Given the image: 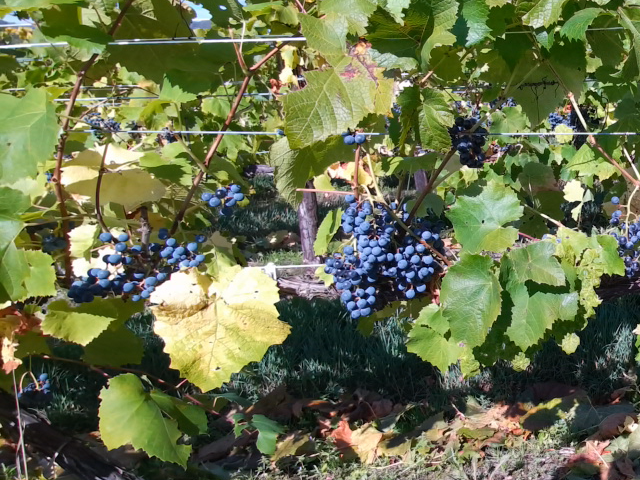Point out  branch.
Returning a JSON list of instances; mask_svg holds the SVG:
<instances>
[{
  "mask_svg": "<svg viewBox=\"0 0 640 480\" xmlns=\"http://www.w3.org/2000/svg\"><path fill=\"white\" fill-rule=\"evenodd\" d=\"M369 147H370V143L366 142L364 144V157H365L366 164L368 166L370 180L374 185V191H375L376 197H377L378 201L383 205V207L385 208L386 212L391 215V217L398 223L399 226L402 227V230H401L399 236L397 237V242L401 243L402 240L404 239L405 235L407 234L411 238L415 239L417 242H419L422 245H425L426 247H428V249L431 250L436 256H438V258L444 264L449 265L450 261L437 248H435L427 240L423 239L422 237L418 236L416 233L412 232L408 228V226L410 224L411 219L413 218L414 213L417 211V209L420 207V205L424 201V198L426 196V193H427L428 189L430 188L431 185H433L435 183V181L441 175V173H442L443 169L445 168L446 164L448 163L449 159L455 154L456 149L455 148H451L450 151L444 156V159L440 163V165L437 168L435 174L433 175V177L430 180H428L426 182V184L424 185V187H423V189L421 191V194H420L418 200L416 201L414 206L410 209L408 215L406 216L405 222H403L402 219L399 218L398 215L395 213V211L390 208L388 202L383 198V196H382V194L380 192L379 183H378V181H377V179L375 177L373 163L371 161L370 154H369Z\"/></svg>",
  "mask_w": 640,
  "mask_h": 480,
  "instance_id": "30e6481e",
  "label": "branch"
},
{
  "mask_svg": "<svg viewBox=\"0 0 640 480\" xmlns=\"http://www.w3.org/2000/svg\"><path fill=\"white\" fill-rule=\"evenodd\" d=\"M99 57H100L99 53H94L88 59V61L84 65L82 71L80 72L79 77L77 78V80L75 82V86L72 89L70 100H69V104H68L66 112L64 114V118L61 120L62 134H61V138H59L58 141H57V160H56V164H55V168H54L53 191H54V194H55L56 198L59 201L60 211H61V215H62V222H63V227H64L63 238L66 240V245L64 247L65 257L63 258V261L65 262V269H66V277H65V280H64L65 284H69L70 280H71L70 250H69V237H68L69 224H68V219H67V213H66V209H65V203H64V199H63V194L61 192V185H60V181H59V170H60L61 163H62V156H63L64 150H65V140L68 138V130H67L69 128V120H68V118L70 117V114L72 112V109H73V106H74V102H75V98H76L77 92L79 90V86H80L81 82L83 81V79H84L86 73L88 72L89 68L93 64V62Z\"/></svg>",
  "mask_w": 640,
  "mask_h": 480,
  "instance_id": "325d2c04",
  "label": "branch"
},
{
  "mask_svg": "<svg viewBox=\"0 0 640 480\" xmlns=\"http://www.w3.org/2000/svg\"><path fill=\"white\" fill-rule=\"evenodd\" d=\"M287 45V42H281L278 45L274 46L269 52H267L262 58H260L255 64H253L248 71L246 72L244 79L242 81V87L241 90L239 91V93L237 94V97L235 98L231 109L229 111V113L226 116V121L224 123V125L222 126V130H227L231 124V119L232 116L235 114L236 109L238 107V104L240 102V99L243 97L244 93L246 92L247 89V84L248 81L250 79V76L252 75V73L259 68L265 61H267L271 56H273L277 51H279L280 49L284 48Z\"/></svg>",
  "mask_w": 640,
  "mask_h": 480,
  "instance_id": "170604dd",
  "label": "branch"
},
{
  "mask_svg": "<svg viewBox=\"0 0 640 480\" xmlns=\"http://www.w3.org/2000/svg\"><path fill=\"white\" fill-rule=\"evenodd\" d=\"M112 142V135H107L106 142L104 144L103 150L101 152L100 163L98 168V176L97 182L95 185V216L98 220V223L104 232L108 231V227L105 225L104 220L100 214V187L103 179V171L105 165L106 155L108 153L109 146Z\"/></svg>",
  "mask_w": 640,
  "mask_h": 480,
  "instance_id": "45aa463d",
  "label": "branch"
},
{
  "mask_svg": "<svg viewBox=\"0 0 640 480\" xmlns=\"http://www.w3.org/2000/svg\"><path fill=\"white\" fill-rule=\"evenodd\" d=\"M203 175H204V171L200 170L198 172V174L195 176V178L193 179L191 187H190L188 193L185 196V199H184V201H183V203H182V205H181V207L179 209V212H178V214L176 216V219L172 223V228H171V232H170L171 236H174L176 234L177 225L181 222V219H182V217L184 215L186 207L189 204V201H190L191 197L194 194L196 186H197L198 182L200 181V179L203 177Z\"/></svg>",
  "mask_w": 640,
  "mask_h": 480,
  "instance_id": "982ccf7c",
  "label": "branch"
},
{
  "mask_svg": "<svg viewBox=\"0 0 640 480\" xmlns=\"http://www.w3.org/2000/svg\"><path fill=\"white\" fill-rule=\"evenodd\" d=\"M589 141L590 143L594 146V148L603 156L606 157V159L610 162V164L619 172L621 173L623 176H625L629 181H631L632 183H634L638 188H640V181L637 180L636 178H634L628 171H626L625 169H623L611 156L610 153H608L606 150H604L598 143L597 141L594 139V136H589Z\"/></svg>",
  "mask_w": 640,
  "mask_h": 480,
  "instance_id": "1ff4a987",
  "label": "branch"
},
{
  "mask_svg": "<svg viewBox=\"0 0 640 480\" xmlns=\"http://www.w3.org/2000/svg\"><path fill=\"white\" fill-rule=\"evenodd\" d=\"M360 156H361V145L357 144L356 145L355 160H354V187H353V196L354 197H358L359 196L358 189H359V163H360Z\"/></svg>",
  "mask_w": 640,
  "mask_h": 480,
  "instance_id": "ea751061",
  "label": "branch"
},
{
  "mask_svg": "<svg viewBox=\"0 0 640 480\" xmlns=\"http://www.w3.org/2000/svg\"><path fill=\"white\" fill-rule=\"evenodd\" d=\"M504 102L505 99L500 98L499 101L491 109H489L480 119L476 121V123L469 129V133L473 134L483 122H485L495 111H497L501 107Z\"/></svg>",
  "mask_w": 640,
  "mask_h": 480,
  "instance_id": "ca6c30ca",
  "label": "branch"
},
{
  "mask_svg": "<svg viewBox=\"0 0 640 480\" xmlns=\"http://www.w3.org/2000/svg\"><path fill=\"white\" fill-rule=\"evenodd\" d=\"M568 96H569V99H570V101H571V103H572V106H573V109H574L575 115H576V117H577V119H578V122L582 125V127L585 129V131H590V127H589V126H588V124L584 121V119H583V117H582V115H581V112H580L579 106H578V104H577V101H576V99H575V97H574L573 92H572V91H569V92H568Z\"/></svg>",
  "mask_w": 640,
  "mask_h": 480,
  "instance_id": "1d269e1b",
  "label": "branch"
},
{
  "mask_svg": "<svg viewBox=\"0 0 640 480\" xmlns=\"http://www.w3.org/2000/svg\"><path fill=\"white\" fill-rule=\"evenodd\" d=\"M133 5V1L129 0L123 7L122 11L118 14V16L115 18L114 24L112 25L111 29L109 30V34L113 35L115 33V31L117 30L120 21L122 20V18L126 15V13L128 12L130 6Z\"/></svg>",
  "mask_w": 640,
  "mask_h": 480,
  "instance_id": "1af6ec82",
  "label": "branch"
},
{
  "mask_svg": "<svg viewBox=\"0 0 640 480\" xmlns=\"http://www.w3.org/2000/svg\"><path fill=\"white\" fill-rule=\"evenodd\" d=\"M221 139H222V136L221 135H217L216 139L214 140L213 144L211 145L209 151L207 152L206 157L204 159V166L206 168L210 167L209 162H210L211 157L214 154V151L216 150L218 144L220 143Z\"/></svg>",
  "mask_w": 640,
  "mask_h": 480,
  "instance_id": "2b1400db",
  "label": "branch"
}]
</instances>
